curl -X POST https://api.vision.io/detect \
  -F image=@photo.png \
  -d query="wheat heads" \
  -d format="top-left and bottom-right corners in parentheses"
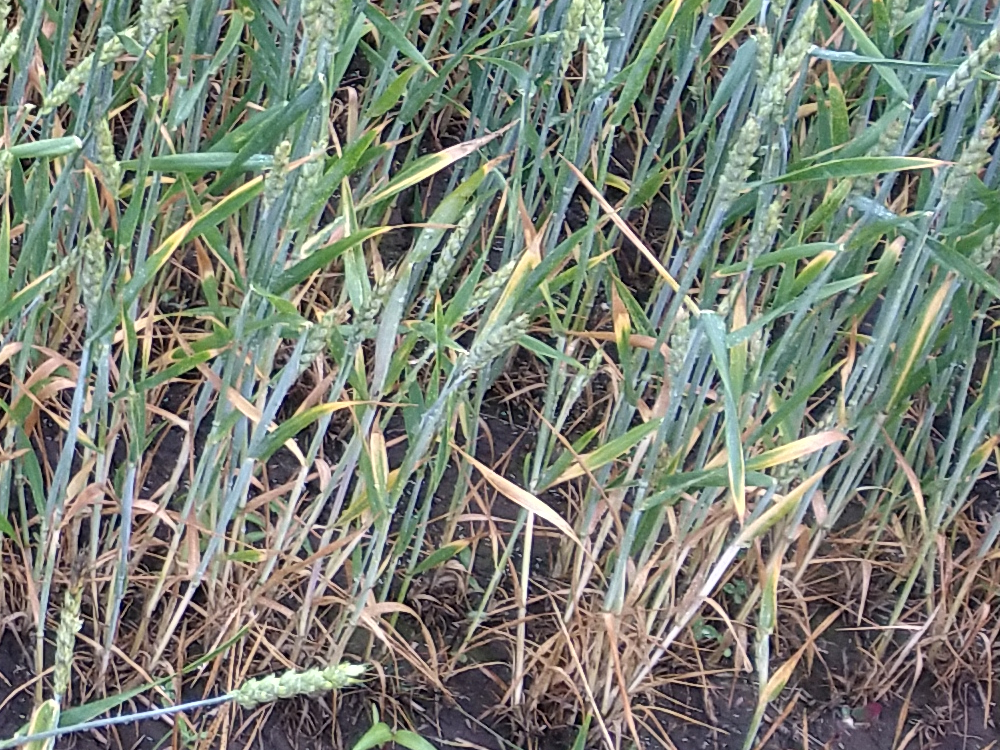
top-left (297, 0), bottom-right (329, 86)
top-left (435, 315), bottom-right (529, 429)
top-left (0, 0), bottom-right (16, 54)
top-left (717, 119), bottom-right (761, 210)
top-left (584, 0), bottom-right (609, 99)
top-left (286, 144), bottom-right (328, 227)
top-left (941, 118), bottom-right (998, 203)
top-left (717, 63), bottom-right (783, 209)
top-left (422, 249), bottom-right (518, 307)
top-left (742, 202), bottom-right (782, 293)
top-left (853, 114), bottom-right (909, 197)
top-left (264, 139), bottom-right (293, 204)
top-left (154, 0), bottom-right (204, 37)
top-left (558, 0), bottom-right (584, 72)
top-left (300, 313), bottom-right (337, 366)
top-left (765, 6), bottom-right (819, 125)
top-left (320, 0), bottom-right (344, 67)
top-left (747, 327), bottom-right (764, 381)
top-left (82, 234), bottom-right (106, 306)
top-left (235, 664), bottom-right (364, 710)
top-left (668, 309), bottom-right (691, 387)
top-left (426, 207), bottom-right (477, 295)
top-left (54, 582), bottom-right (83, 701)
top-left (0, 31), bottom-right (21, 110)
top-left (971, 223), bottom-right (1000, 270)
top-left (743, 494), bottom-right (802, 541)
top-left (0, 153), bottom-right (12, 223)
top-left (352, 274), bottom-right (396, 335)
top-left (40, 40), bottom-right (121, 113)
top-left (932, 28), bottom-right (1000, 110)
top-left (95, 119), bottom-right (119, 191)
top-left (714, 14), bottom-right (816, 209)
top-left (888, 0), bottom-right (917, 33)
top-left (141, 0), bottom-right (166, 49)
top-left (467, 263), bottom-right (517, 311)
